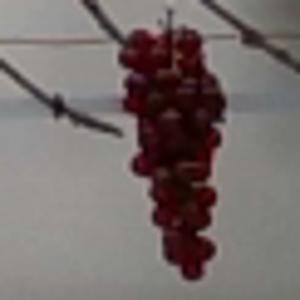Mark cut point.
Instances as JSON below:
<instances>
[{"label":"cut point","mask_w":300,"mask_h":300,"mask_svg":"<svg viewBox=\"0 0 300 300\" xmlns=\"http://www.w3.org/2000/svg\"><path fill=\"white\" fill-rule=\"evenodd\" d=\"M163 11L166 14L165 32L170 29H174V18L178 11V5L176 0H165L163 4Z\"/></svg>","instance_id":"obj_1"}]
</instances>
